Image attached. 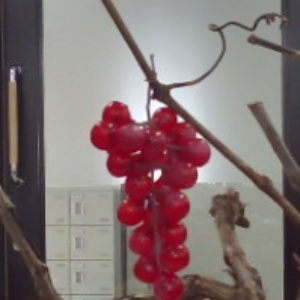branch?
Instances as JSON below:
<instances>
[{
  "label": "branch",
  "instance_id": "obj_1",
  "mask_svg": "<svg viewBox=\"0 0 300 300\" xmlns=\"http://www.w3.org/2000/svg\"><path fill=\"white\" fill-rule=\"evenodd\" d=\"M101 3L105 11L110 14V17L112 18L116 28L119 30L121 36L128 44V47L130 48L134 59L137 61L144 75L147 77V81L151 84L154 90L153 95H151V99L162 101L166 103L169 108H173L174 111H177V114L188 125L192 126L193 129L205 140H208V142L229 164L233 165L245 177L252 180L254 185L261 191L262 194L271 198L277 206H279L289 214V216L297 225H300V212L289 201V198L278 192L275 181L268 176L262 175L255 171L245 160L240 158L237 153L228 148V146H226L222 140H220L218 137H215L208 127L201 124L197 120V118L190 112H188L186 108H184L180 104V102L176 101L170 93L172 89H175L177 87H190L200 84L208 76H211L216 68L219 67V63L223 60L224 54L226 53L227 46L222 29L227 28L229 25H233L241 27L248 32H255L257 27L261 25L262 20H265L267 25H271V23L275 22V17L288 22L287 16H284L278 12H269L267 14H262L255 19L254 26L251 28L246 24L234 20H229L228 22H225L220 26H217L216 24H209V30L213 32H219V36L222 40L223 50L220 57L212 64V66L207 71L202 73L197 79L188 82H171L170 84H166L157 80L158 71L155 70V60L153 58L155 57V54H150L151 66H149L143 52H141V49L136 44L132 33L126 27L123 15L118 11L115 4L111 0H101Z\"/></svg>",
  "mask_w": 300,
  "mask_h": 300
},
{
  "label": "branch",
  "instance_id": "obj_2",
  "mask_svg": "<svg viewBox=\"0 0 300 300\" xmlns=\"http://www.w3.org/2000/svg\"><path fill=\"white\" fill-rule=\"evenodd\" d=\"M246 205L241 202L239 190L228 189L225 194L212 197L208 214L214 219V228L223 251V261L228 270L222 273L233 276L234 286L199 273L185 274V292L182 300L204 298H234L235 300H265L259 270L246 262V253L238 246L235 226L251 227V219L244 216Z\"/></svg>",
  "mask_w": 300,
  "mask_h": 300
},
{
  "label": "branch",
  "instance_id": "obj_3",
  "mask_svg": "<svg viewBox=\"0 0 300 300\" xmlns=\"http://www.w3.org/2000/svg\"><path fill=\"white\" fill-rule=\"evenodd\" d=\"M10 208H16V205L7 196L3 187L0 186V221L13 238L14 249L30 268L35 286L39 290L42 300H61V296L52 286L47 266H44V262H41L32 251L31 244L19 223L10 214Z\"/></svg>",
  "mask_w": 300,
  "mask_h": 300
},
{
  "label": "branch",
  "instance_id": "obj_4",
  "mask_svg": "<svg viewBox=\"0 0 300 300\" xmlns=\"http://www.w3.org/2000/svg\"><path fill=\"white\" fill-rule=\"evenodd\" d=\"M248 110L258 123L263 135L267 139L274 153L280 159L284 166V173L289 180L290 185L300 192V167L293 161V156L289 154L285 145L281 141L274 128L272 117L267 112L264 101L257 100L252 104L247 103Z\"/></svg>",
  "mask_w": 300,
  "mask_h": 300
},
{
  "label": "branch",
  "instance_id": "obj_5",
  "mask_svg": "<svg viewBox=\"0 0 300 300\" xmlns=\"http://www.w3.org/2000/svg\"><path fill=\"white\" fill-rule=\"evenodd\" d=\"M246 41L253 46L257 47H265L270 50H274L281 54H287L293 57H300V51L289 49L283 44L275 43L272 40L265 39L262 37H258L255 33H251L247 38Z\"/></svg>",
  "mask_w": 300,
  "mask_h": 300
}]
</instances>
